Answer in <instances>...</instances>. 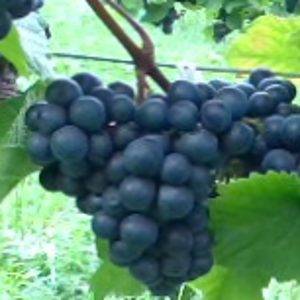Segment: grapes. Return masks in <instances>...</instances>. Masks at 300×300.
<instances>
[{
	"label": "grapes",
	"instance_id": "obj_1",
	"mask_svg": "<svg viewBox=\"0 0 300 300\" xmlns=\"http://www.w3.org/2000/svg\"><path fill=\"white\" fill-rule=\"evenodd\" d=\"M296 84L254 68L237 83L173 80L142 101L89 72L60 76L25 111V153L50 193L75 197L110 261L157 296L214 266L213 176L300 170Z\"/></svg>",
	"mask_w": 300,
	"mask_h": 300
}]
</instances>
